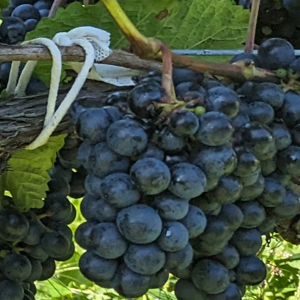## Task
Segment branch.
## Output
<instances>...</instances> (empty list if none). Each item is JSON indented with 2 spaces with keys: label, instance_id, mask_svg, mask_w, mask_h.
Returning a JSON list of instances; mask_svg holds the SVG:
<instances>
[{
  "label": "branch",
  "instance_id": "1",
  "mask_svg": "<svg viewBox=\"0 0 300 300\" xmlns=\"http://www.w3.org/2000/svg\"><path fill=\"white\" fill-rule=\"evenodd\" d=\"M103 5L131 43L128 47L114 49L111 54L103 58V61L94 63L121 66L122 68L138 72L160 74L162 72L163 48H165L170 52L171 64L175 67H186L194 71L223 74L234 81H250L256 77L262 79H273L275 77L273 70L254 67V63L250 60H238L226 65L198 62L190 58L178 57L160 40L151 37L145 38L139 29L133 25L116 0H103Z\"/></svg>",
  "mask_w": 300,
  "mask_h": 300
},
{
  "label": "branch",
  "instance_id": "2",
  "mask_svg": "<svg viewBox=\"0 0 300 300\" xmlns=\"http://www.w3.org/2000/svg\"><path fill=\"white\" fill-rule=\"evenodd\" d=\"M260 0H252V9L250 11V19L245 41V51L251 53L254 49V35L256 29L257 14L259 11Z\"/></svg>",
  "mask_w": 300,
  "mask_h": 300
}]
</instances>
